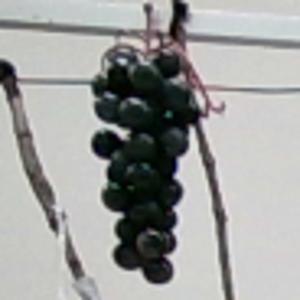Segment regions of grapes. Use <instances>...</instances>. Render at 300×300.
Wrapping results in <instances>:
<instances>
[{
    "label": "grapes",
    "instance_id": "01657485",
    "mask_svg": "<svg viewBox=\"0 0 300 300\" xmlns=\"http://www.w3.org/2000/svg\"><path fill=\"white\" fill-rule=\"evenodd\" d=\"M184 67L180 53L161 49L147 61L126 66L115 63L93 76L90 89L97 100L94 114L104 124L115 123L129 133L122 138L109 128L95 132L90 142L94 156L110 162L109 182L99 198L105 210L123 213L112 233L119 244L112 252L116 266L139 269L143 280L165 286L175 276L173 261L179 240L174 207L184 188L174 179L178 159L191 146L188 126L202 116L192 85L176 79Z\"/></svg>",
    "mask_w": 300,
    "mask_h": 300
}]
</instances>
